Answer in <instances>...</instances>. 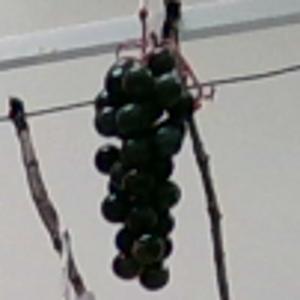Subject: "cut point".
Instances as JSON below:
<instances>
[{"label": "cut point", "mask_w": 300, "mask_h": 300, "mask_svg": "<svg viewBox=\"0 0 300 300\" xmlns=\"http://www.w3.org/2000/svg\"><path fill=\"white\" fill-rule=\"evenodd\" d=\"M151 8L150 0H139V6L135 12V19L141 27L142 32V43H141V53L139 59L142 60L145 55H147V36H148V26L151 21Z\"/></svg>", "instance_id": "obj_1"}]
</instances>
